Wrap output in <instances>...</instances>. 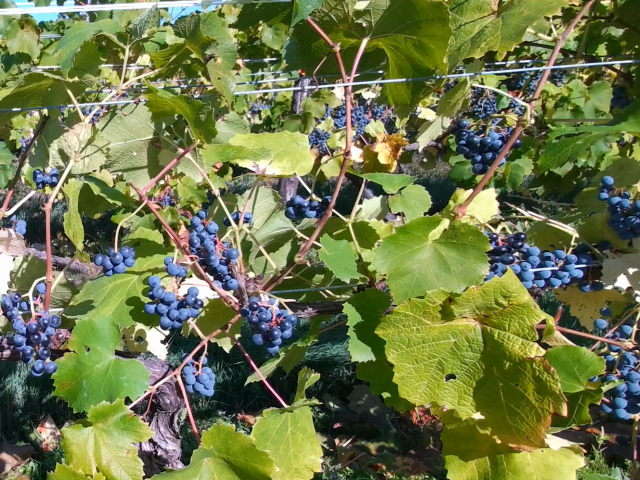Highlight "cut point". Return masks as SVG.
Here are the masks:
<instances>
[{
    "mask_svg": "<svg viewBox=\"0 0 640 480\" xmlns=\"http://www.w3.org/2000/svg\"><path fill=\"white\" fill-rule=\"evenodd\" d=\"M345 156V152L331 156L330 158H328L326 161L320 163V165L318 166L316 172H315V176H318V174L320 173L321 169L323 168L324 165L330 163L333 159L339 158Z\"/></svg>",
    "mask_w": 640,
    "mask_h": 480,
    "instance_id": "obj_1",
    "label": "cut point"
},
{
    "mask_svg": "<svg viewBox=\"0 0 640 480\" xmlns=\"http://www.w3.org/2000/svg\"><path fill=\"white\" fill-rule=\"evenodd\" d=\"M494 117H507V118H510L512 120H515L516 122H519V118H517V117H515L513 115H509V114H491L489 116V118L487 119L486 127L490 126V122Z\"/></svg>",
    "mask_w": 640,
    "mask_h": 480,
    "instance_id": "obj_2",
    "label": "cut point"
},
{
    "mask_svg": "<svg viewBox=\"0 0 640 480\" xmlns=\"http://www.w3.org/2000/svg\"><path fill=\"white\" fill-rule=\"evenodd\" d=\"M466 213H467V214H469V215H471V217H473V218L476 220V222H478L479 224L484 225V226H487L488 228H492V226H491L489 223L482 221V220H481L479 217H477V215H475L473 212H471V211H469V210H465L463 214H466Z\"/></svg>",
    "mask_w": 640,
    "mask_h": 480,
    "instance_id": "obj_3",
    "label": "cut point"
},
{
    "mask_svg": "<svg viewBox=\"0 0 640 480\" xmlns=\"http://www.w3.org/2000/svg\"><path fill=\"white\" fill-rule=\"evenodd\" d=\"M44 280H46L45 276L42 277V278H37L31 283L30 289H29V296H28V302L29 303H32V291H33V288H34L35 284L40 282V281H44Z\"/></svg>",
    "mask_w": 640,
    "mask_h": 480,
    "instance_id": "obj_4",
    "label": "cut point"
},
{
    "mask_svg": "<svg viewBox=\"0 0 640 480\" xmlns=\"http://www.w3.org/2000/svg\"><path fill=\"white\" fill-rule=\"evenodd\" d=\"M40 137H41V139L43 140V143H44V145H45V148H46V150H47V152H48L49 164H52L51 149H50V147L48 146V142H47V140H46V138H45V136H44V134H43V133L41 134V136H40Z\"/></svg>",
    "mask_w": 640,
    "mask_h": 480,
    "instance_id": "obj_5",
    "label": "cut point"
},
{
    "mask_svg": "<svg viewBox=\"0 0 640 480\" xmlns=\"http://www.w3.org/2000/svg\"><path fill=\"white\" fill-rule=\"evenodd\" d=\"M145 206V203L139 204L138 207L130 214V216L124 219V222L130 221L136 215V213H138L139 210H141V208Z\"/></svg>",
    "mask_w": 640,
    "mask_h": 480,
    "instance_id": "obj_6",
    "label": "cut point"
}]
</instances>
